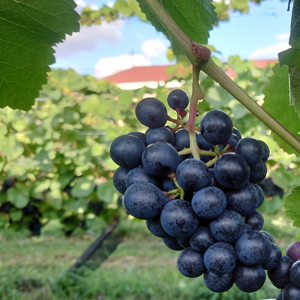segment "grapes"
Segmentation results:
<instances>
[{
  "mask_svg": "<svg viewBox=\"0 0 300 300\" xmlns=\"http://www.w3.org/2000/svg\"><path fill=\"white\" fill-rule=\"evenodd\" d=\"M166 106L147 97L136 106L146 130L117 137L110 156L119 166L113 175L125 210L146 221L177 257L186 278L203 275L205 285L223 293L235 285L254 293L266 273L281 289L276 300H300V241L282 255L273 237L261 230L264 201L258 183L267 175L268 145L242 138L224 111L201 119L200 132L188 123L187 94L175 89Z\"/></svg>",
  "mask_w": 300,
  "mask_h": 300,
  "instance_id": "1",
  "label": "grapes"
}]
</instances>
